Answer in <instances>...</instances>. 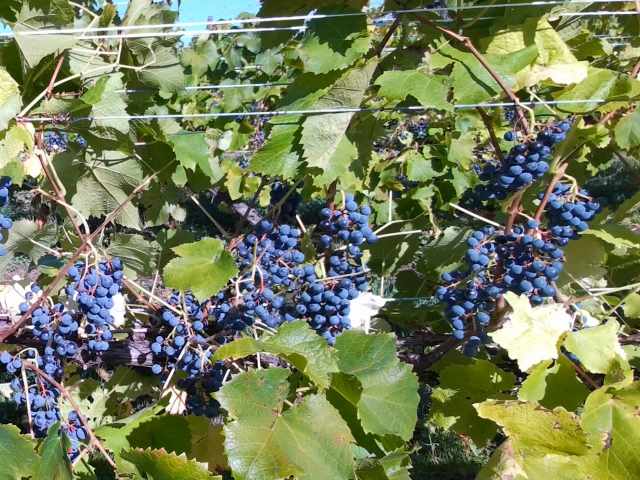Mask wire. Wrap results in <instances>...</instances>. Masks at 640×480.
<instances>
[{"instance_id":"obj_1","label":"wire","mask_w":640,"mask_h":480,"mask_svg":"<svg viewBox=\"0 0 640 480\" xmlns=\"http://www.w3.org/2000/svg\"><path fill=\"white\" fill-rule=\"evenodd\" d=\"M586 0L577 1H543V2H530V3H488L485 5L474 4H456L449 7H406L400 9H384L375 11H360V12H340L328 15L321 14H298L289 15L283 17H266V18H235V19H223V20H196L190 23H170L169 25H128V26H107V27H92L87 29H38V30H26L18 32H0V37H20L28 35H41V34H89L94 32H109V31H130V30H171L173 28H192L199 25H225V24H250L254 22H285L291 20L300 19H318V20H330L343 17H362V16H377L386 14H402L408 12H452L458 9L465 10H487L490 8H533V7H545V6H579L586 5Z\"/></svg>"},{"instance_id":"obj_2","label":"wire","mask_w":640,"mask_h":480,"mask_svg":"<svg viewBox=\"0 0 640 480\" xmlns=\"http://www.w3.org/2000/svg\"><path fill=\"white\" fill-rule=\"evenodd\" d=\"M424 105H400L387 108L379 107H360L357 109H315L308 111L297 110H278V111H257L254 113L244 111H231V112H209V113H166V114H153V115H113V116H90V115H76V116H59V117H37V116H25L15 117V122H44L55 123L61 121H115V120H138V121H157L158 119L168 118H212V117H233L242 116L247 118H256L259 116H276V117H290V116H310L317 114H360L362 112H377V113H389L394 111L403 110H424Z\"/></svg>"},{"instance_id":"obj_3","label":"wire","mask_w":640,"mask_h":480,"mask_svg":"<svg viewBox=\"0 0 640 480\" xmlns=\"http://www.w3.org/2000/svg\"><path fill=\"white\" fill-rule=\"evenodd\" d=\"M308 24L288 25V26H266L256 27L252 29H231L224 28L221 30H205V31H174V32H157V33H137V34H99V35H83L76 36V41L85 40H102V39H140V38H160V37H176V36H207V35H223V34H254L268 31H290L308 29Z\"/></svg>"},{"instance_id":"obj_4","label":"wire","mask_w":640,"mask_h":480,"mask_svg":"<svg viewBox=\"0 0 640 480\" xmlns=\"http://www.w3.org/2000/svg\"><path fill=\"white\" fill-rule=\"evenodd\" d=\"M615 101L640 102V98H588V99H557V100H539L523 102V107L541 106V105H560V104H590V103H609Z\"/></svg>"}]
</instances>
